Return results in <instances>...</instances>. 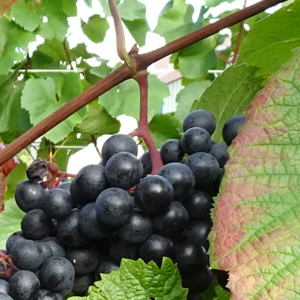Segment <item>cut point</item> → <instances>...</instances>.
<instances>
[{
  "mask_svg": "<svg viewBox=\"0 0 300 300\" xmlns=\"http://www.w3.org/2000/svg\"><path fill=\"white\" fill-rule=\"evenodd\" d=\"M148 75L147 70L136 75L134 81L139 85V126L136 128V136L143 138L148 149L156 148V142L148 130Z\"/></svg>",
  "mask_w": 300,
  "mask_h": 300,
  "instance_id": "1",
  "label": "cut point"
}]
</instances>
